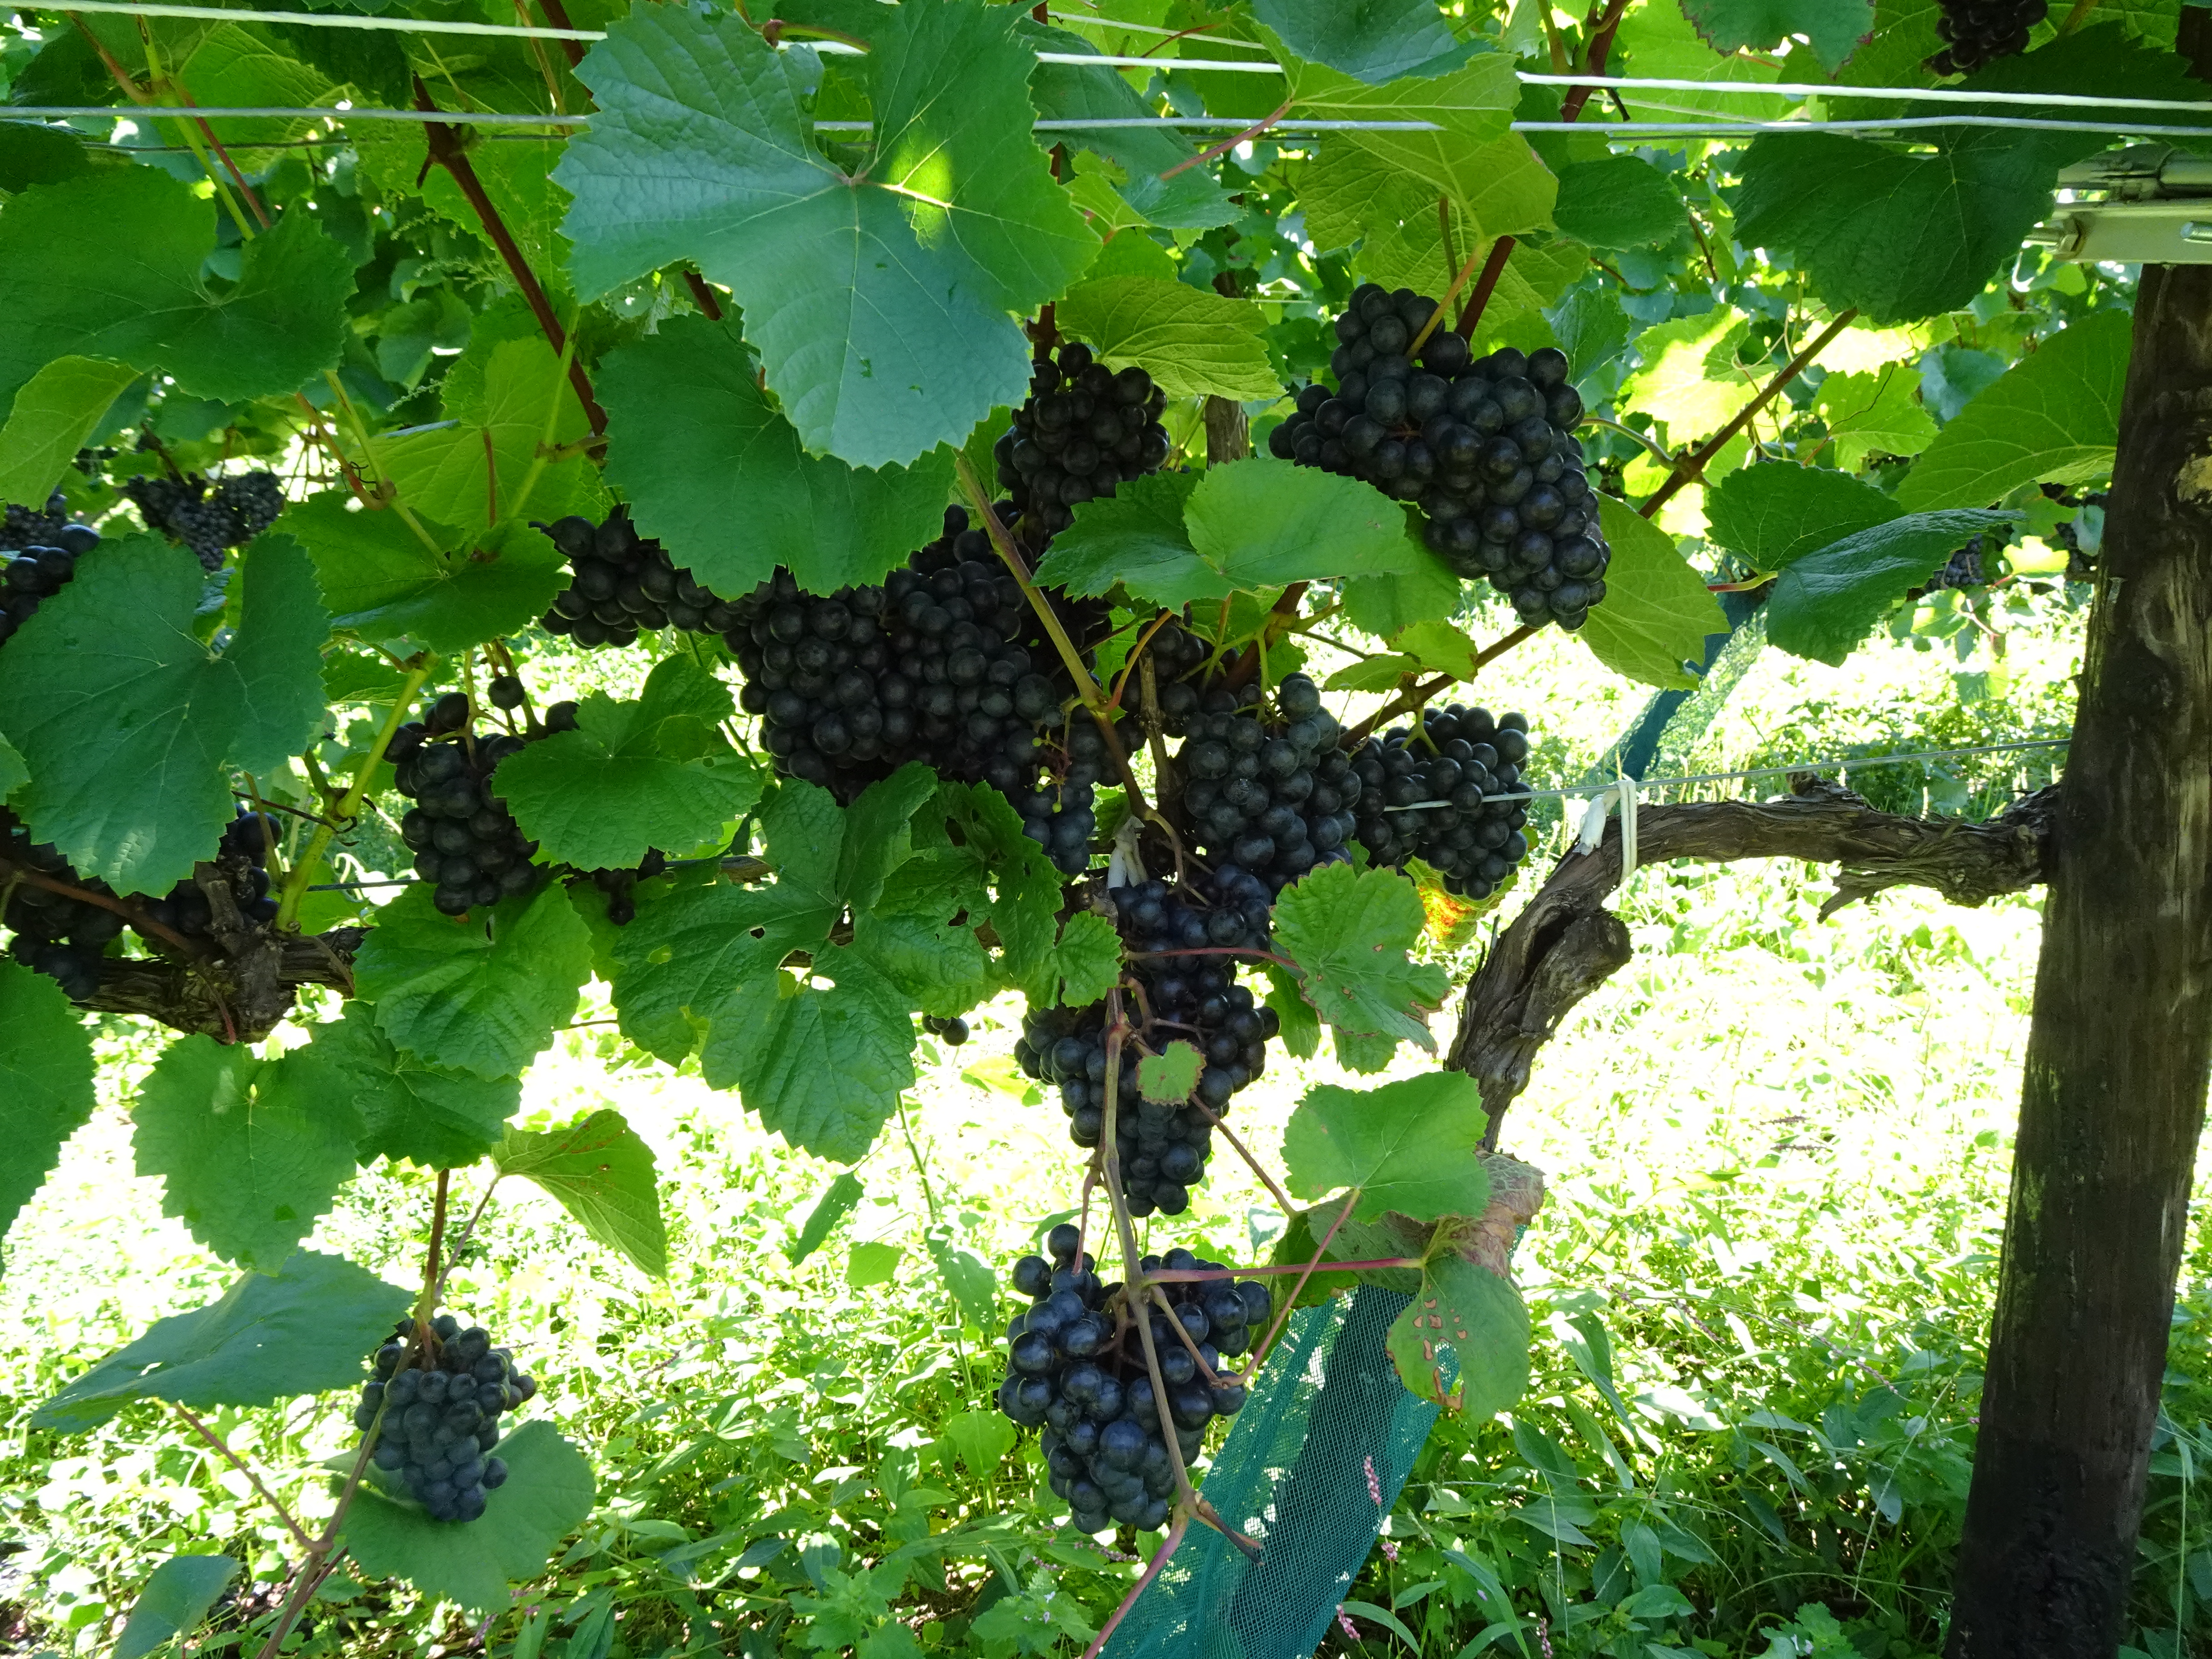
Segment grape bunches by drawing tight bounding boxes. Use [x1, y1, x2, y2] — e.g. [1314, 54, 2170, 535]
[1408, 704, 1534, 901]
[885, 506, 1061, 815]
[922, 1016, 970, 1045]
[983, 673, 1146, 874]
[0, 804, 124, 1001]
[540, 503, 669, 649]
[981, 500, 1122, 698]
[0, 523, 102, 641]
[995, 339, 1173, 544]
[127, 803, 283, 967]
[1109, 866, 1274, 972]
[1350, 725, 1434, 887]
[723, 564, 913, 805]
[1112, 608, 1241, 748]
[355, 1315, 538, 1523]
[1342, 347, 1610, 633]
[489, 677, 664, 927]
[1929, 0, 2052, 82]
[1182, 674, 1363, 902]
[999, 1224, 1272, 1532]
[1269, 283, 1459, 487]
[1014, 963, 1279, 1217]
[383, 692, 550, 916]
[642, 542, 774, 634]
[1935, 535, 1986, 591]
